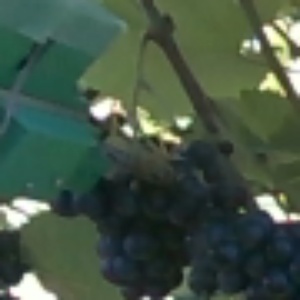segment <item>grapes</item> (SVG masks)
<instances>
[{
	"label": "grapes",
	"mask_w": 300,
	"mask_h": 300,
	"mask_svg": "<svg viewBox=\"0 0 300 300\" xmlns=\"http://www.w3.org/2000/svg\"><path fill=\"white\" fill-rule=\"evenodd\" d=\"M216 146L193 139L151 174L125 168L99 178L93 191H64L51 200L61 217L86 216L102 233L100 274L131 299H163L188 283L204 298L245 288L249 300L300 291V228L274 225L270 213L239 212L245 194L219 180Z\"/></svg>",
	"instance_id": "1"
}]
</instances>
